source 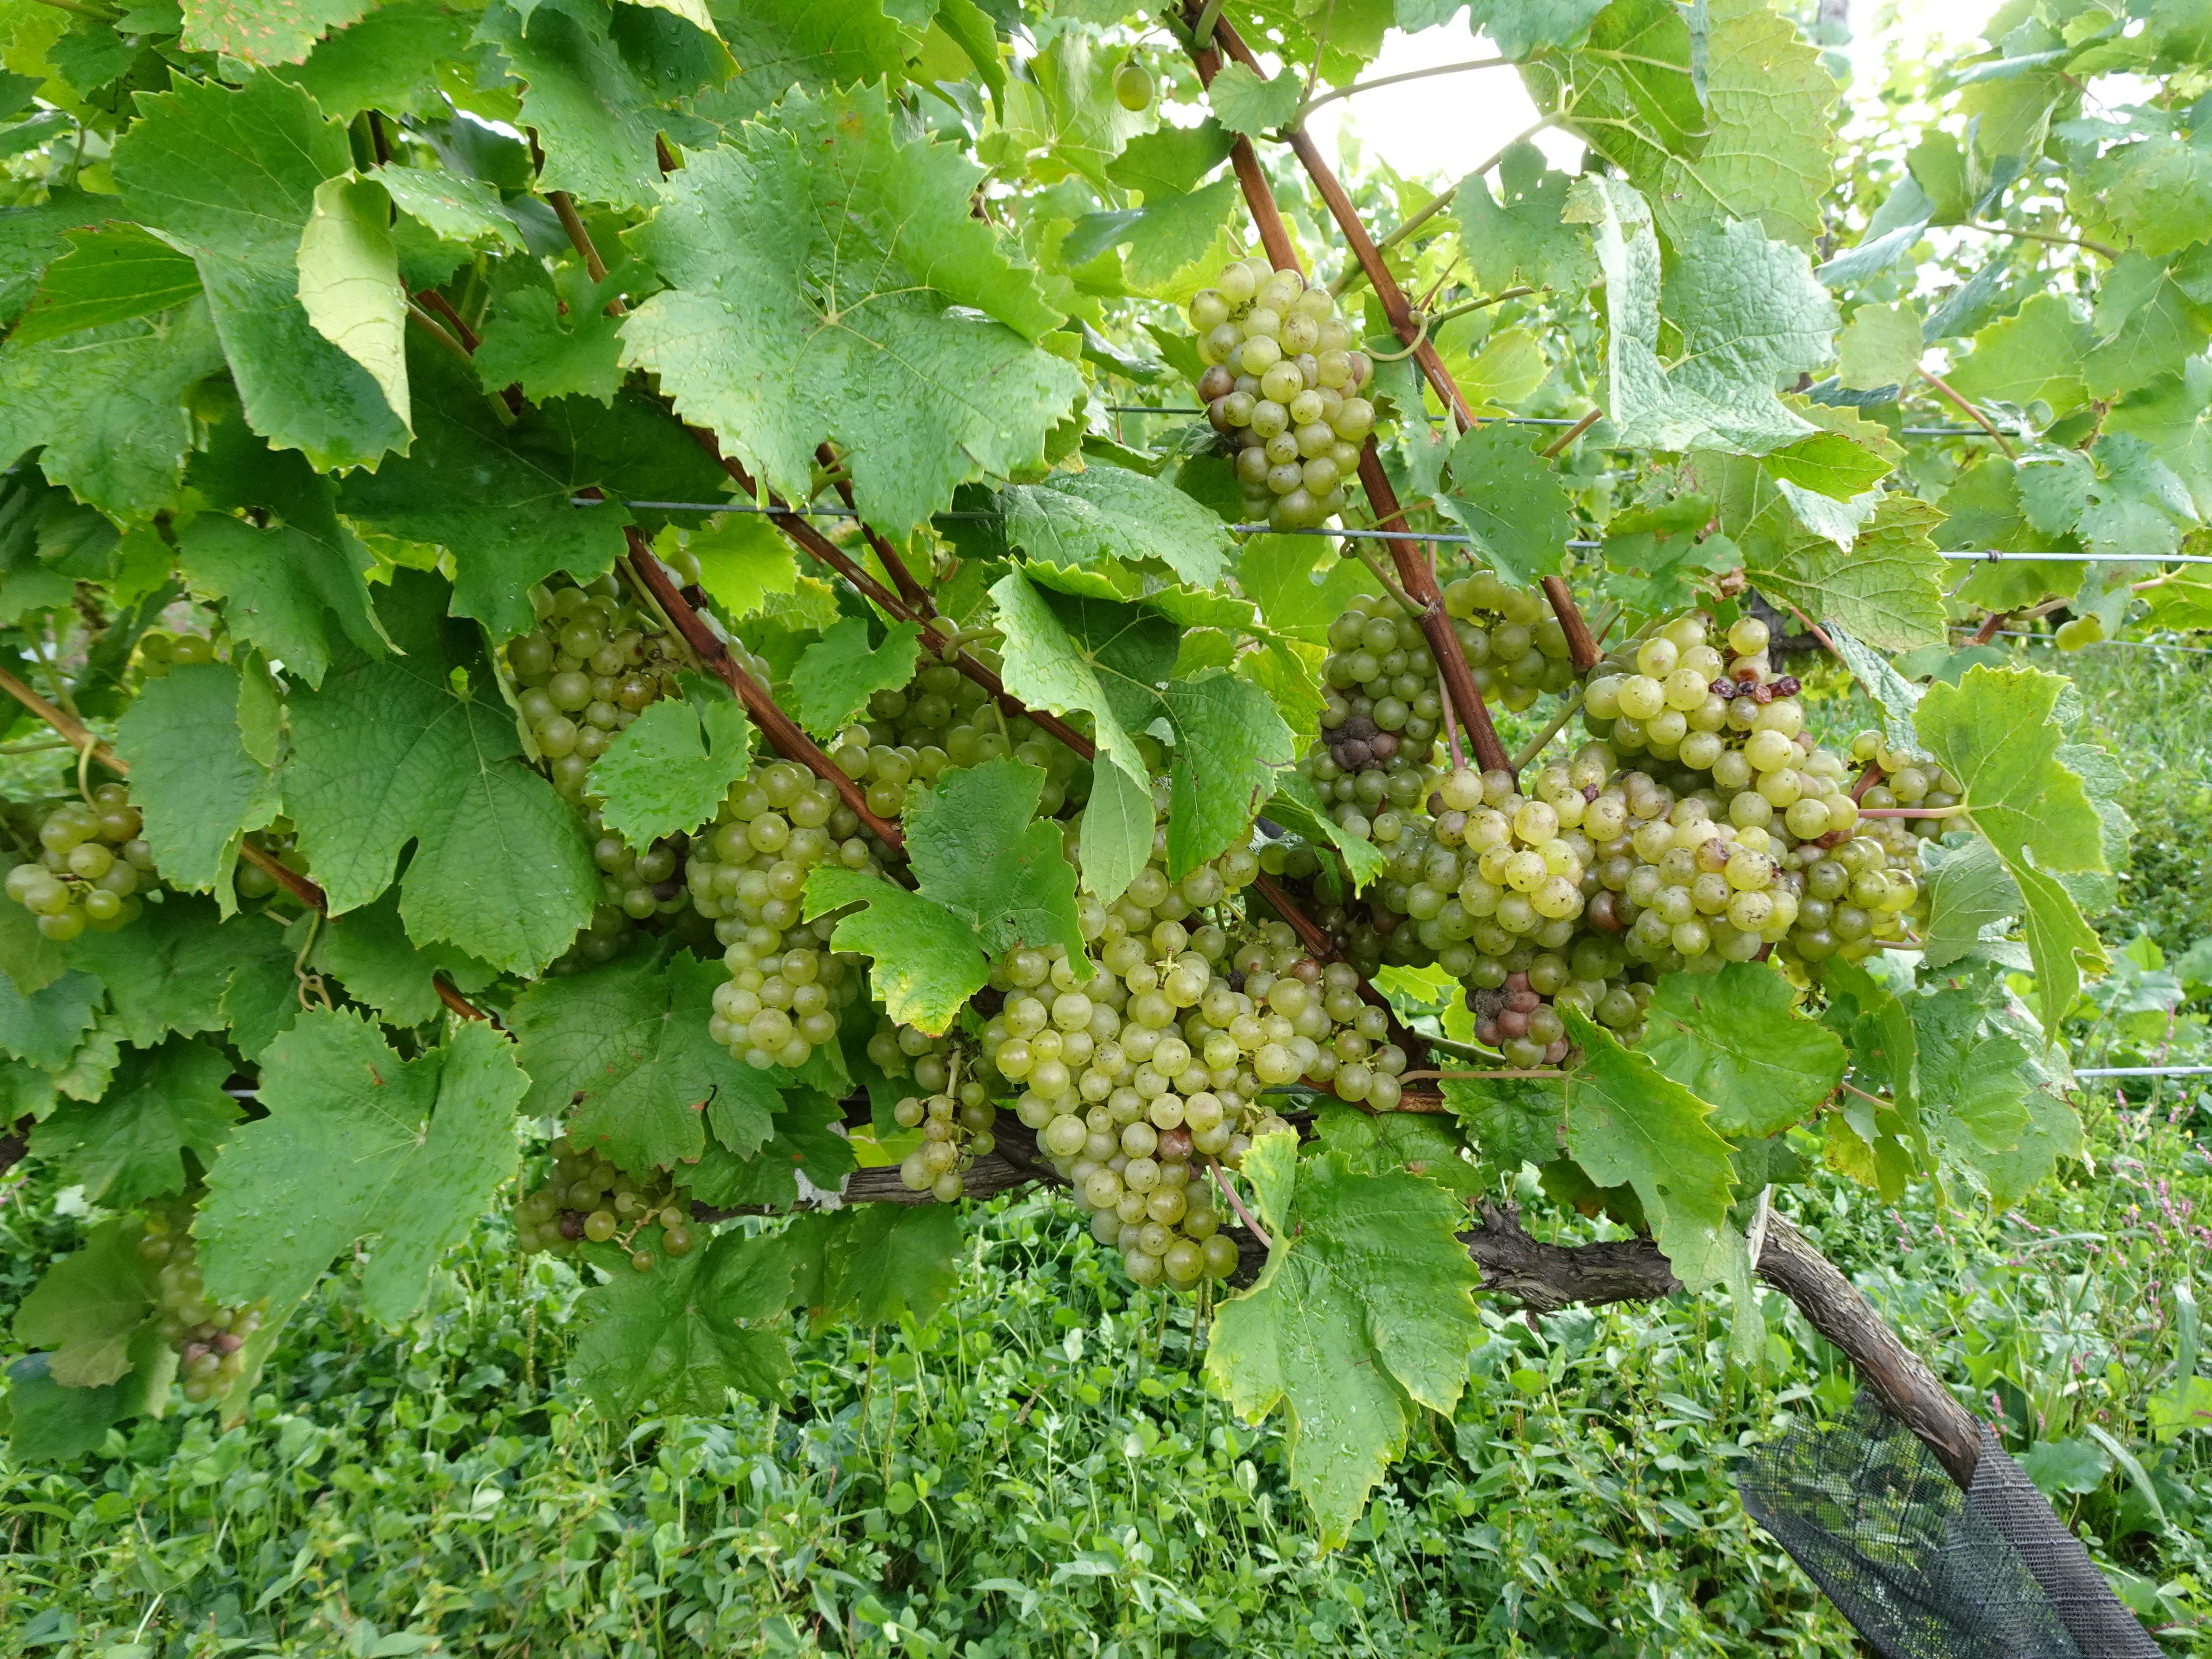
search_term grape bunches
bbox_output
[1385,766,1595,1068]
[1581,606,1857,848]
[1193,923,1406,1107]
[1070,780,1259,940]
[663,907,727,972]
[1188,256,1376,532]
[1112,57,1156,112]
[138,1184,264,1402]
[501,551,769,918]
[1440,571,1576,715]
[0,784,172,938]
[827,617,1165,897]
[1294,591,1445,828]
[135,633,212,679]
[982,920,1290,1293]
[1775,836,1917,981]
[1256,813,1438,982]
[513,1136,661,1258]
[235,815,311,897]
[685,758,883,1071]
[867,999,1010,1202]
[584,1191,691,1271]
[1848,730,1979,846]
[546,903,634,976]
[1528,744,1674,1047]
[1625,787,1796,978]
